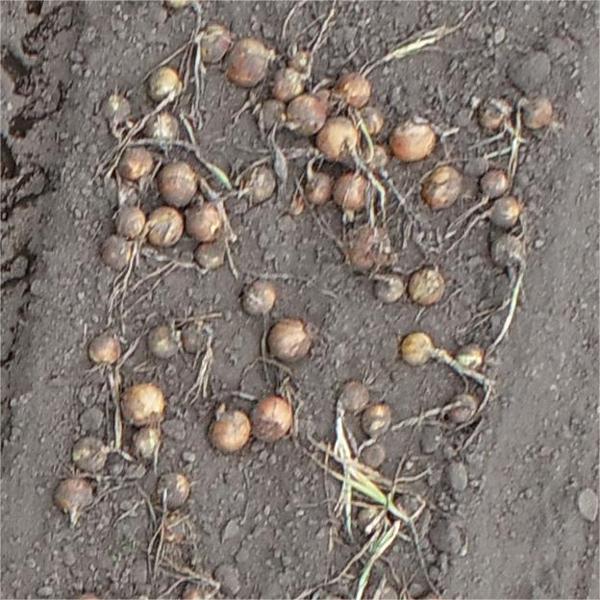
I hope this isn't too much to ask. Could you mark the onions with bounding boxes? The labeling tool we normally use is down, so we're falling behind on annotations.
[147,323,177,357]
[272,67,302,99]
[155,472,189,508]
[287,91,327,132]
[186,202,222,238]
[208,409,250,452]
[144,206,183,246]
[54,476,93,511]
[399,330,433,365]
[262,103,284,127]
[125,423,161,456]
[476,99,506,131]
[363,147,386,171]
[389,120,433,161]
[182,580,218,600]
[238,165,273,202]
[121,384,164,425]
[363,444,385,468]
[268,317,311,361]
[242,279,279,314]
[115,207,146,239]
[337,379,371,414]
[72,437,103,469]
[163,0,192,7]
[334,174,368,209]
[406,265,444,305]
[481,168,509,196]
[519,95,552,129]
[315,117,359,160]
[117,145,152,181]
[455,343,483,370]
[97,236,128,267]
[351,105,384,137]
[193,240,222,268]
[178,324,206,352]
[115,179,141,204]
[361,404,391,435]
[488,195,519,225]
[349,227,392,269]
[158,161,197,203]
[359,507,386,532]
[145,111,180,145]
[148,67,180,99]
[88,335,121,363]
[420,164,464,208]
[442,397,473,424]
[305,173,332,203]
[102,92,128,120]
[374,269,405,303]
[159,515,186,542]
[197,26,229,63]
[226,38,272,86]
[251,395,294,440]
[331,71,369,107]
[289,50,310,73]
